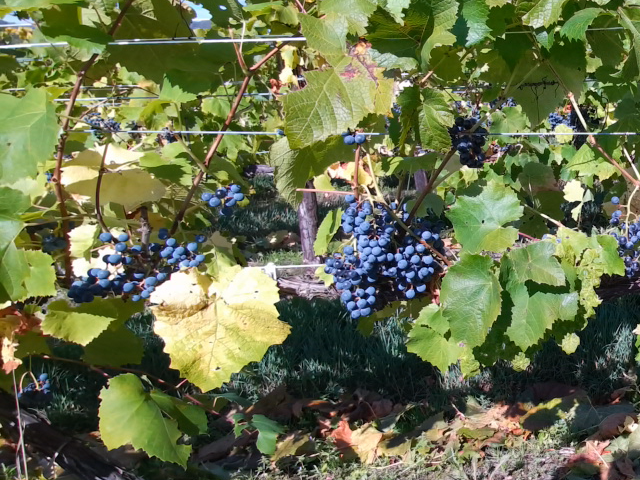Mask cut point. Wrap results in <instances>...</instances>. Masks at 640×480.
<instances>
[{
	"instance_id": "cut-point-1",
	"label": "cut point",
	"mask_w": 640,
	"mask_h": 480,
	"mask_svg": "<svg viewBox=\"0 0 640 480\" xmlns=\"http://www.w3.org/2000/svg\"><path fill=\"white\" fill-rule=\"evenodd\" d=\"M640 190V188H638L636 185L633 188L632 192L629 194L627 201H626V205L630 206L632 204V200L634 199L635 195L637 194V192Z\"/></svg>"
}]
</instances>
